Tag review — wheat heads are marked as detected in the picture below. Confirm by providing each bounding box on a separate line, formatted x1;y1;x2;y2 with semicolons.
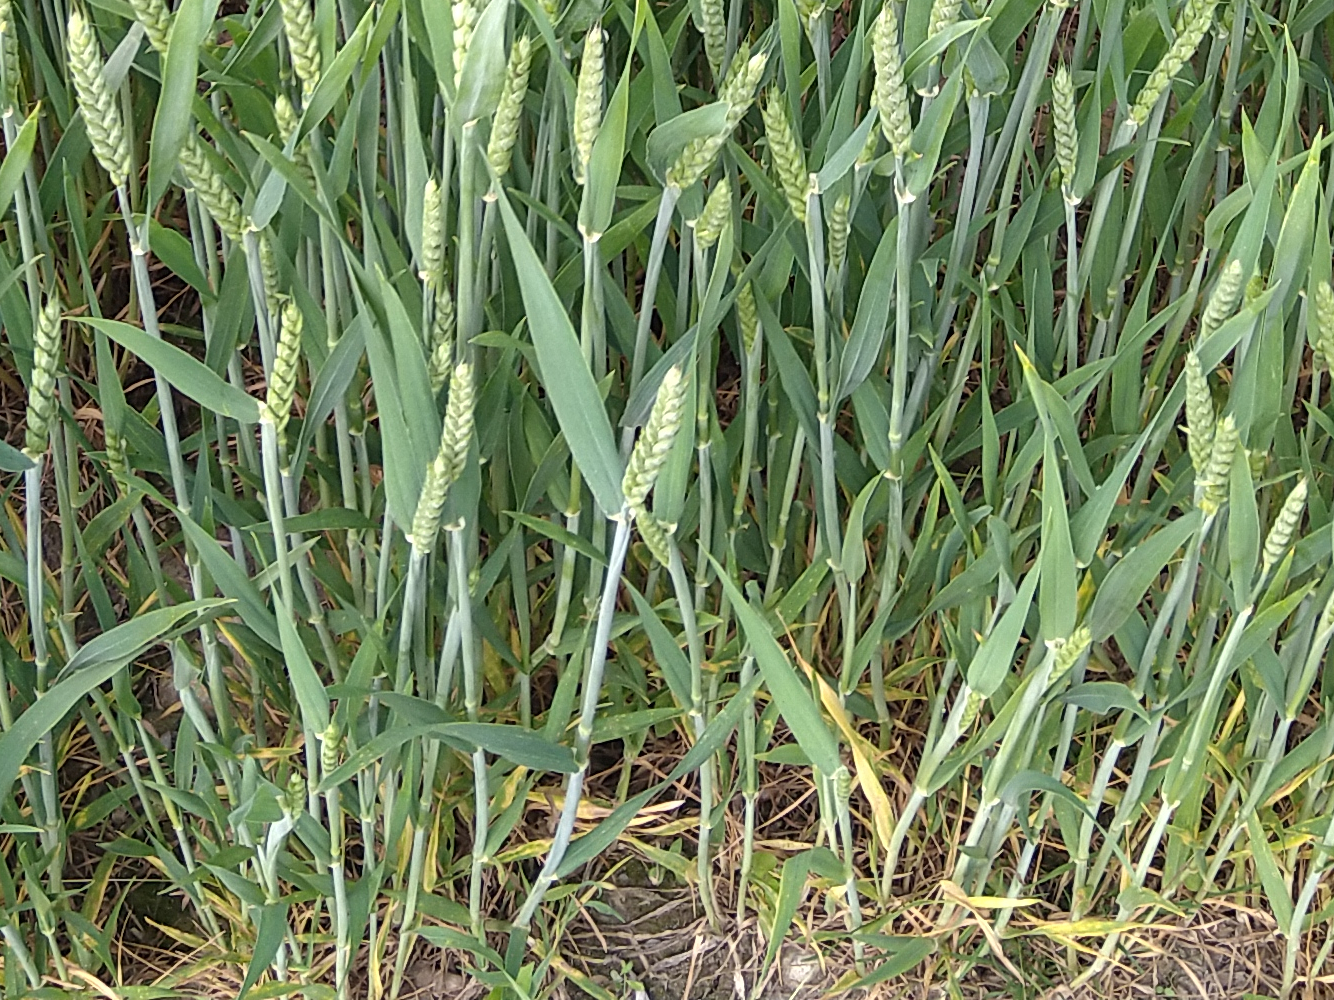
1229;0;1262;27
449;0;491;90
102;0;168;67
442;363;474;473
430;280;454;394
23;301;61;449
828;195;849;271
671;56;769;184
869;5;913;150
268;301;303;430
409;454;450;557
960;0;991;23
180;135;250;249
1203;419;1241;506
1265;479;1308;562
571;27;606;186
322;720;339;775
0;0;15;108
259;237;282;319
1197;261;1244;349
637;508;667;566
1050;630;1091;682
761;97;807;222
928;0;971;47
1052;67;1079;184
488;35;534;176
288;771;307;818
1323;564;1334;633
698;0;726;80
103;427;132;490
695;180;734;250
66;9;131;166
273;92;312;164
273;0;321;105
1110;0;1217;148
419;180;447;273
1182;355;1215;479
734;267;758;349
1315;285;1334;398
624;367;684;513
